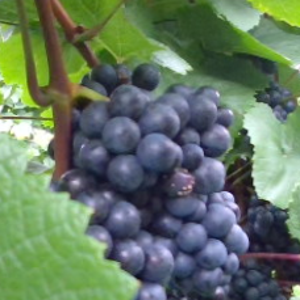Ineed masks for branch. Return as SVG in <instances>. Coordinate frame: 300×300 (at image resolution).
Returning a JSON list of instances; mask_svg holds the SVG:
<instances>
[{
    "instance_id": "branch-1",
    "label": "branch",
    "mask_w": 300,
    "mask_h": 300,
    "mask_svg": "<svg viewBox=\"0 0 300 300\" xmlns=\"http://www.w3.org/2000/svg\"><path fill=\"white\" fill-rule=\"evenodd\" d=\"M42 33L48 53L49 84L38 86V79L33 64L32 43L29 28L24 16V2H17V19L23 37V52L26 58L27 86L33 100L41 107L52 102L54 119V159L55 170L50 188L60 191V175L70 169V121L71 107L77 102L73 83L67 73L60 49V37L54 26V17L59 22L74 48L81 52L92 65L101 64L88 35L74 23L58 0H35Z\"/></svg>"
}]
</instances>
